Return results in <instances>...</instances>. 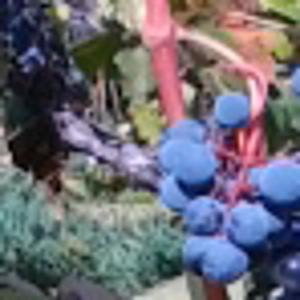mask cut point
<instances>
[{
	"label": "cut point",
	"mask_w": 300,
	"mask_h": 300,
	"mask_svg": "<svg viewBox=\"0 0 300 300\" xmlns=\"http://www.w3.org/2000/svg\"><path fill=\"white\" fill-rule=\"evenodd\" d=\"M171 27H172V36L175 40H180L181 38H186L188 40H192L195 42L209 45V46L217 49L219 52H221L226 57L237 62L241 66L243 72L246 75V80L248 82V87L250 89V94H251V102L253 104H256L258 102V91H257V86H256L255 80H254L255 75L251 71L250 67L248 66V64L246 63V60L243 57L239 56L238 54H236L233 51H230L228 48H226L224 45H222L221 43H219L218 41H216L214 39L185 31L184 28L182 26H179V24L176 21H173L171 23Z\"/></svg>",
	"instance_id": "obj_1"
}]
</instances>
